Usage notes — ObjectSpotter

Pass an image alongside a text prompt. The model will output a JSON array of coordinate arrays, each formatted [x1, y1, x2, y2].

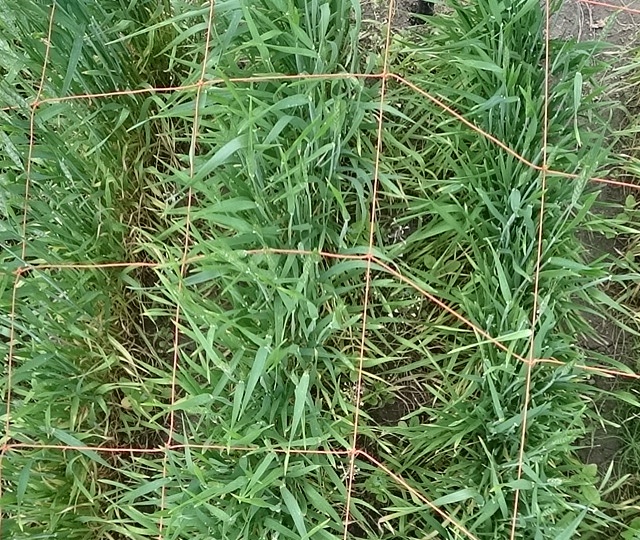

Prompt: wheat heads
[[541, 509, 556, 518], [0, 90, 18, 107], [553, 435, 570, 444], [544, 147, 560, 168], [330, 104, 343, 132], [243, 150, 255, 176], [0, 4, 22, 43], [0, 47, 31, 73], [2, 147, 25, 170], [562, 358, 575, 376], [537, 294, 550, 317], [502, 48, 512, 70], [536, 168, 544, 191], [571, 168, 584, 209], [300, 163, 309, 182], [547, 476, 562, 485], [58, 161, 75, 179], [218, 250, 247, 270]]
